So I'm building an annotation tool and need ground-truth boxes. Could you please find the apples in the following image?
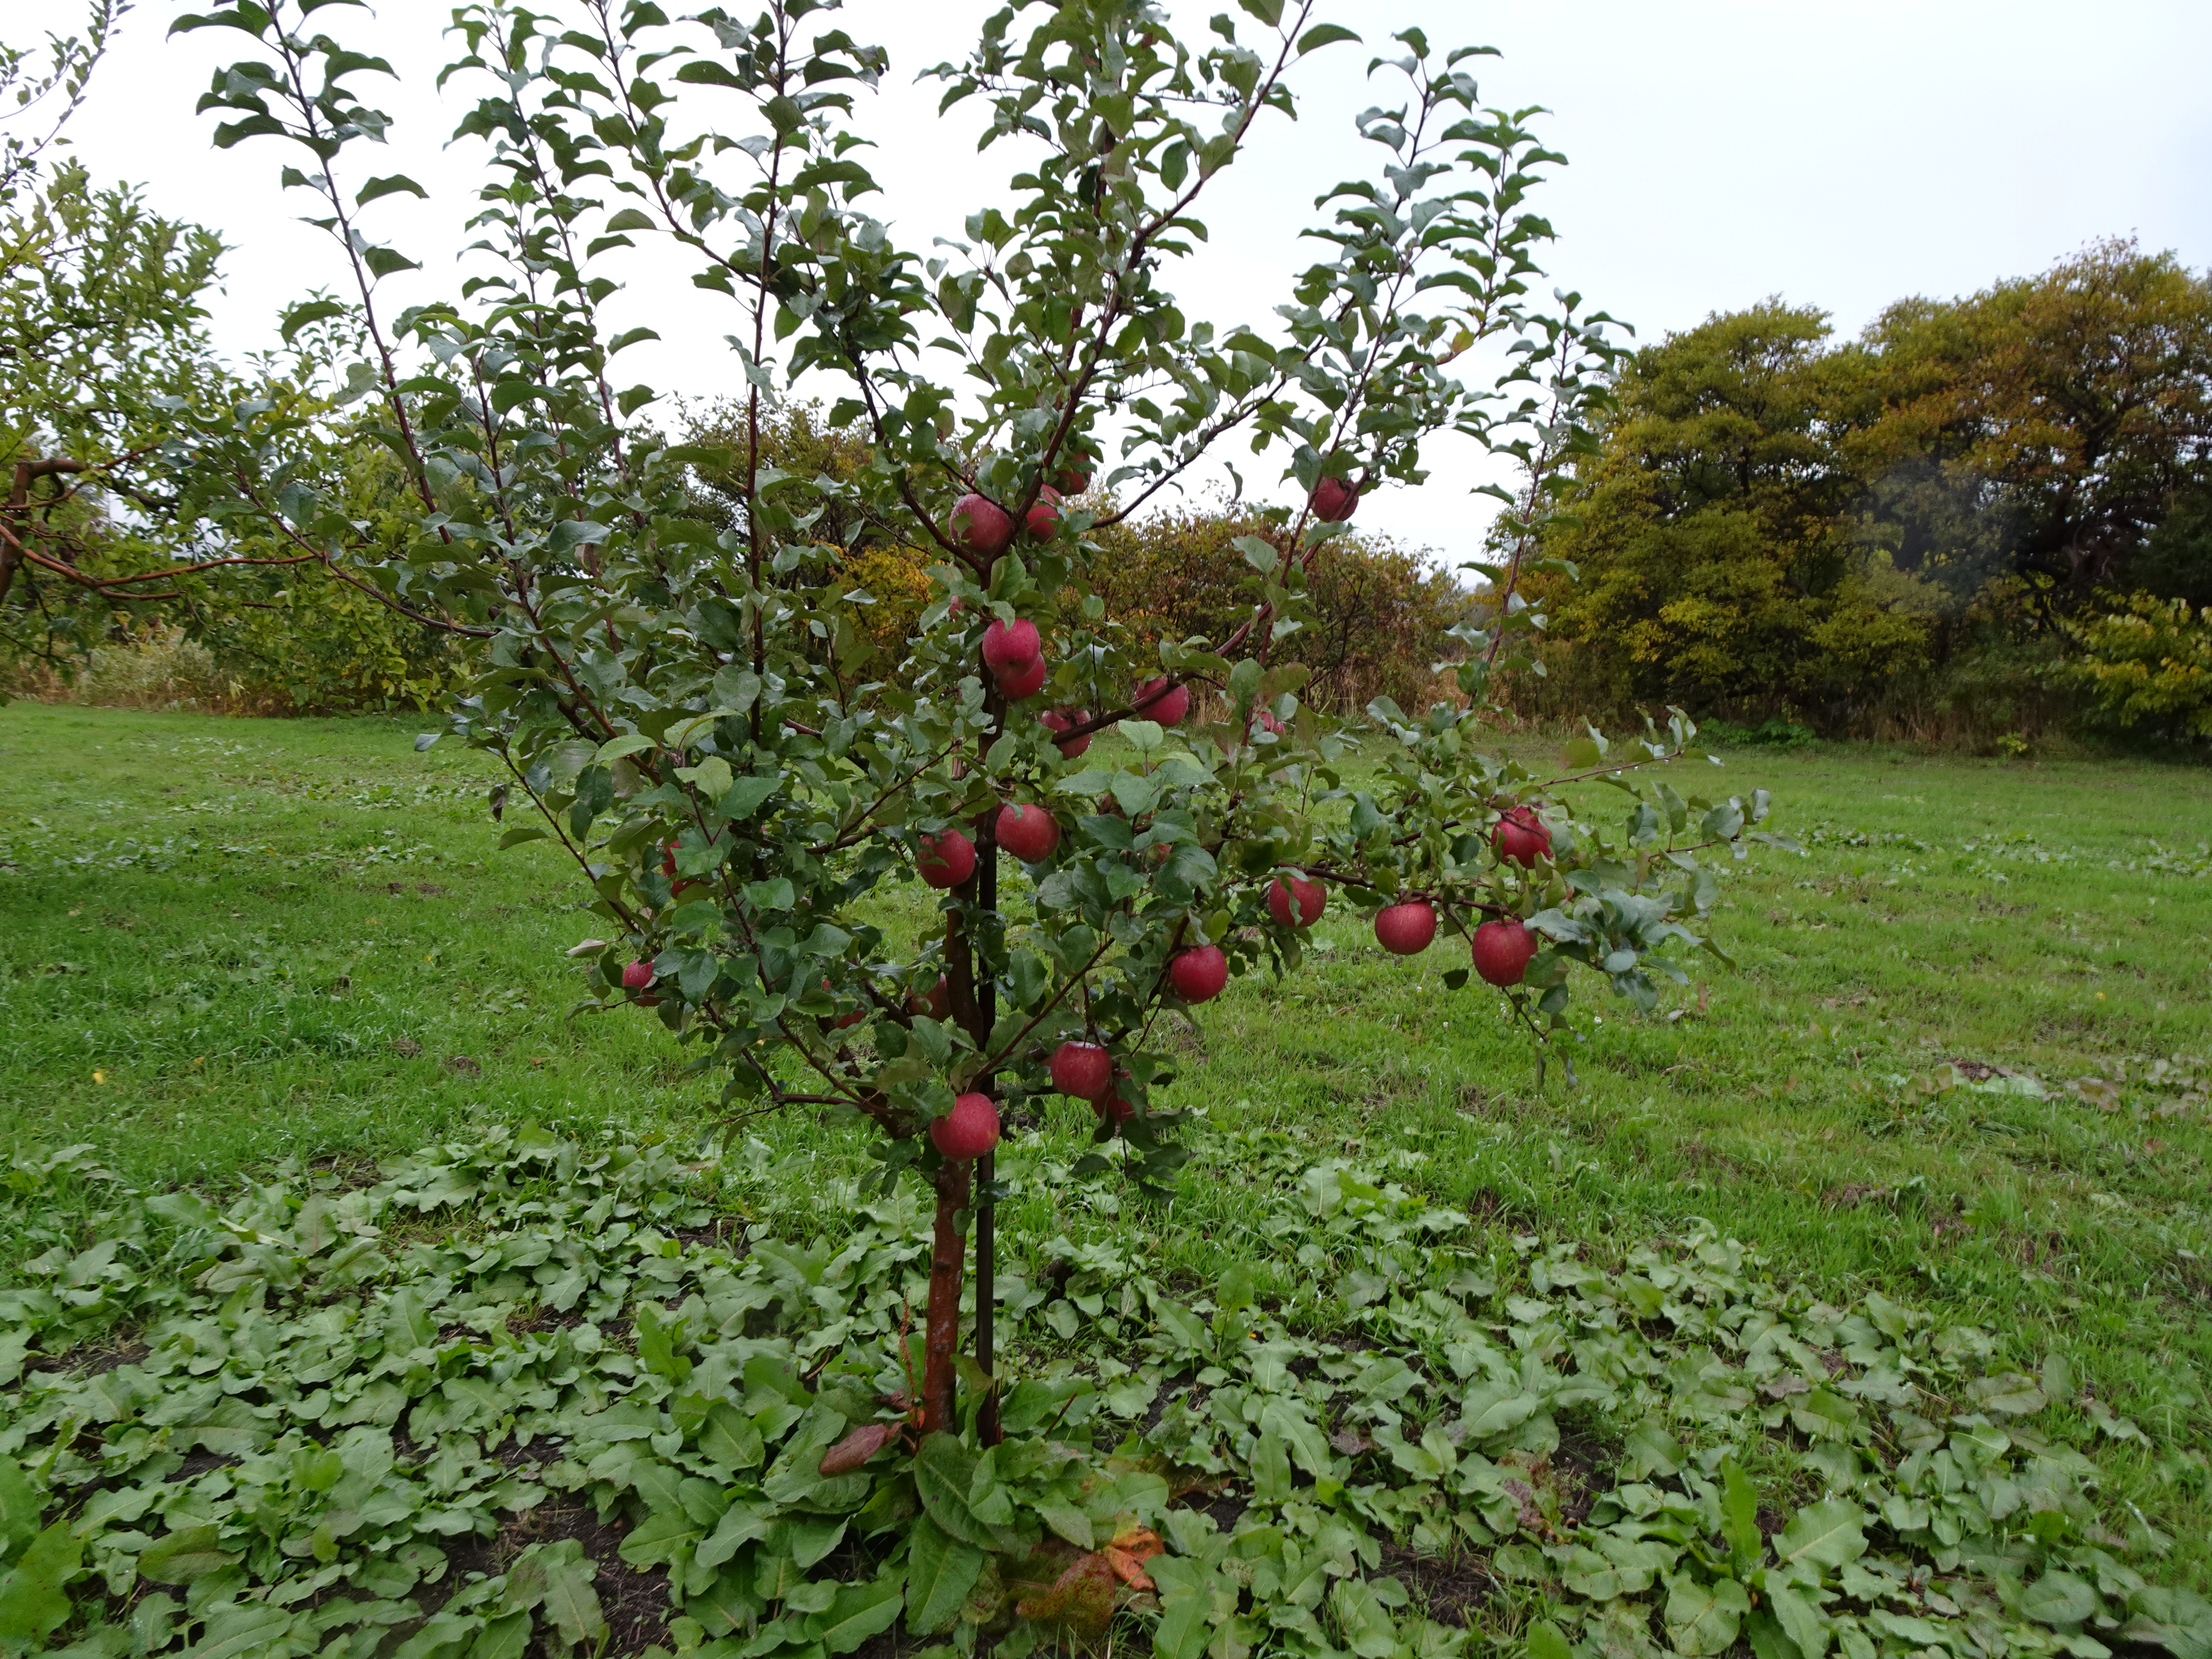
[1261,720,1285,733]
[1311,477,1358,523]
[995,803,1061,865]
[661,840,682,876]
[1099,793,1151,831]
[1050,450,1091,496]
[962,800,1006,824]
[1491,804,1553,869]
[982,617,1040,680]
[1133,677,1189,727]
[661,869,696,900]
[1040,703,1093,761]
[1152,843,1170,862]
[1269,875,1327,928]
[950,595,960,620]
[1374,901,1437,955]
[930,1092,1000,1161]
[1253,707,1274,726]
[1171,945,1228,1002]
[1026,482,1064,541]
[1091,1069,1147,1121]
[994,653,1045,701]
[1050,1041,1111,1100]
[949,493,1012,557]
[905,974,951,1023]
[622,957,664,1007]
[1472,919,1538,987]
[822,978,866,1029]
[915,828,975,889]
